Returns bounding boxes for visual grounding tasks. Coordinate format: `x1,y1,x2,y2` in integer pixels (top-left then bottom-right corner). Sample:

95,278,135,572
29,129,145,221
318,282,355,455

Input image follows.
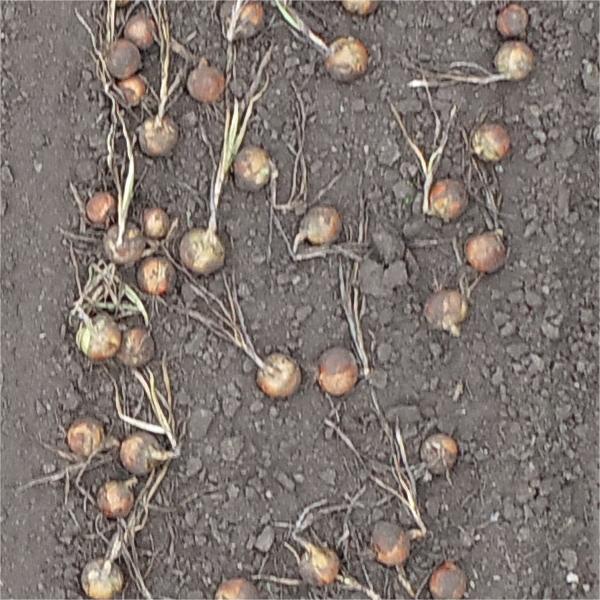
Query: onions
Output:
256,353,299,395
124,16,154,46
82,192,114,224
179,228,225,274
423,288,466,329
323,35,367,80
464,229,505,272
103,223,144,261
369,521,409,563
215,576,255,599
493,40,533,78
424,561,465,596
105,40,139,75
299,542,340,583
419,434,457,473
426,178,467,220
64,417,103,455
133,256,173,294
77,317,120,359
341,0,375,17
494,3,527,37
114,73,145,104
79,559,122,597
225,1,267,39
138,116,177,154
141,207,169,236
470,123,509,161
120,433,163,471
314,345,359,395
298,205,338,245
96,476,136,515
184,64,225,102
231,146,272,188
116,326,153,364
